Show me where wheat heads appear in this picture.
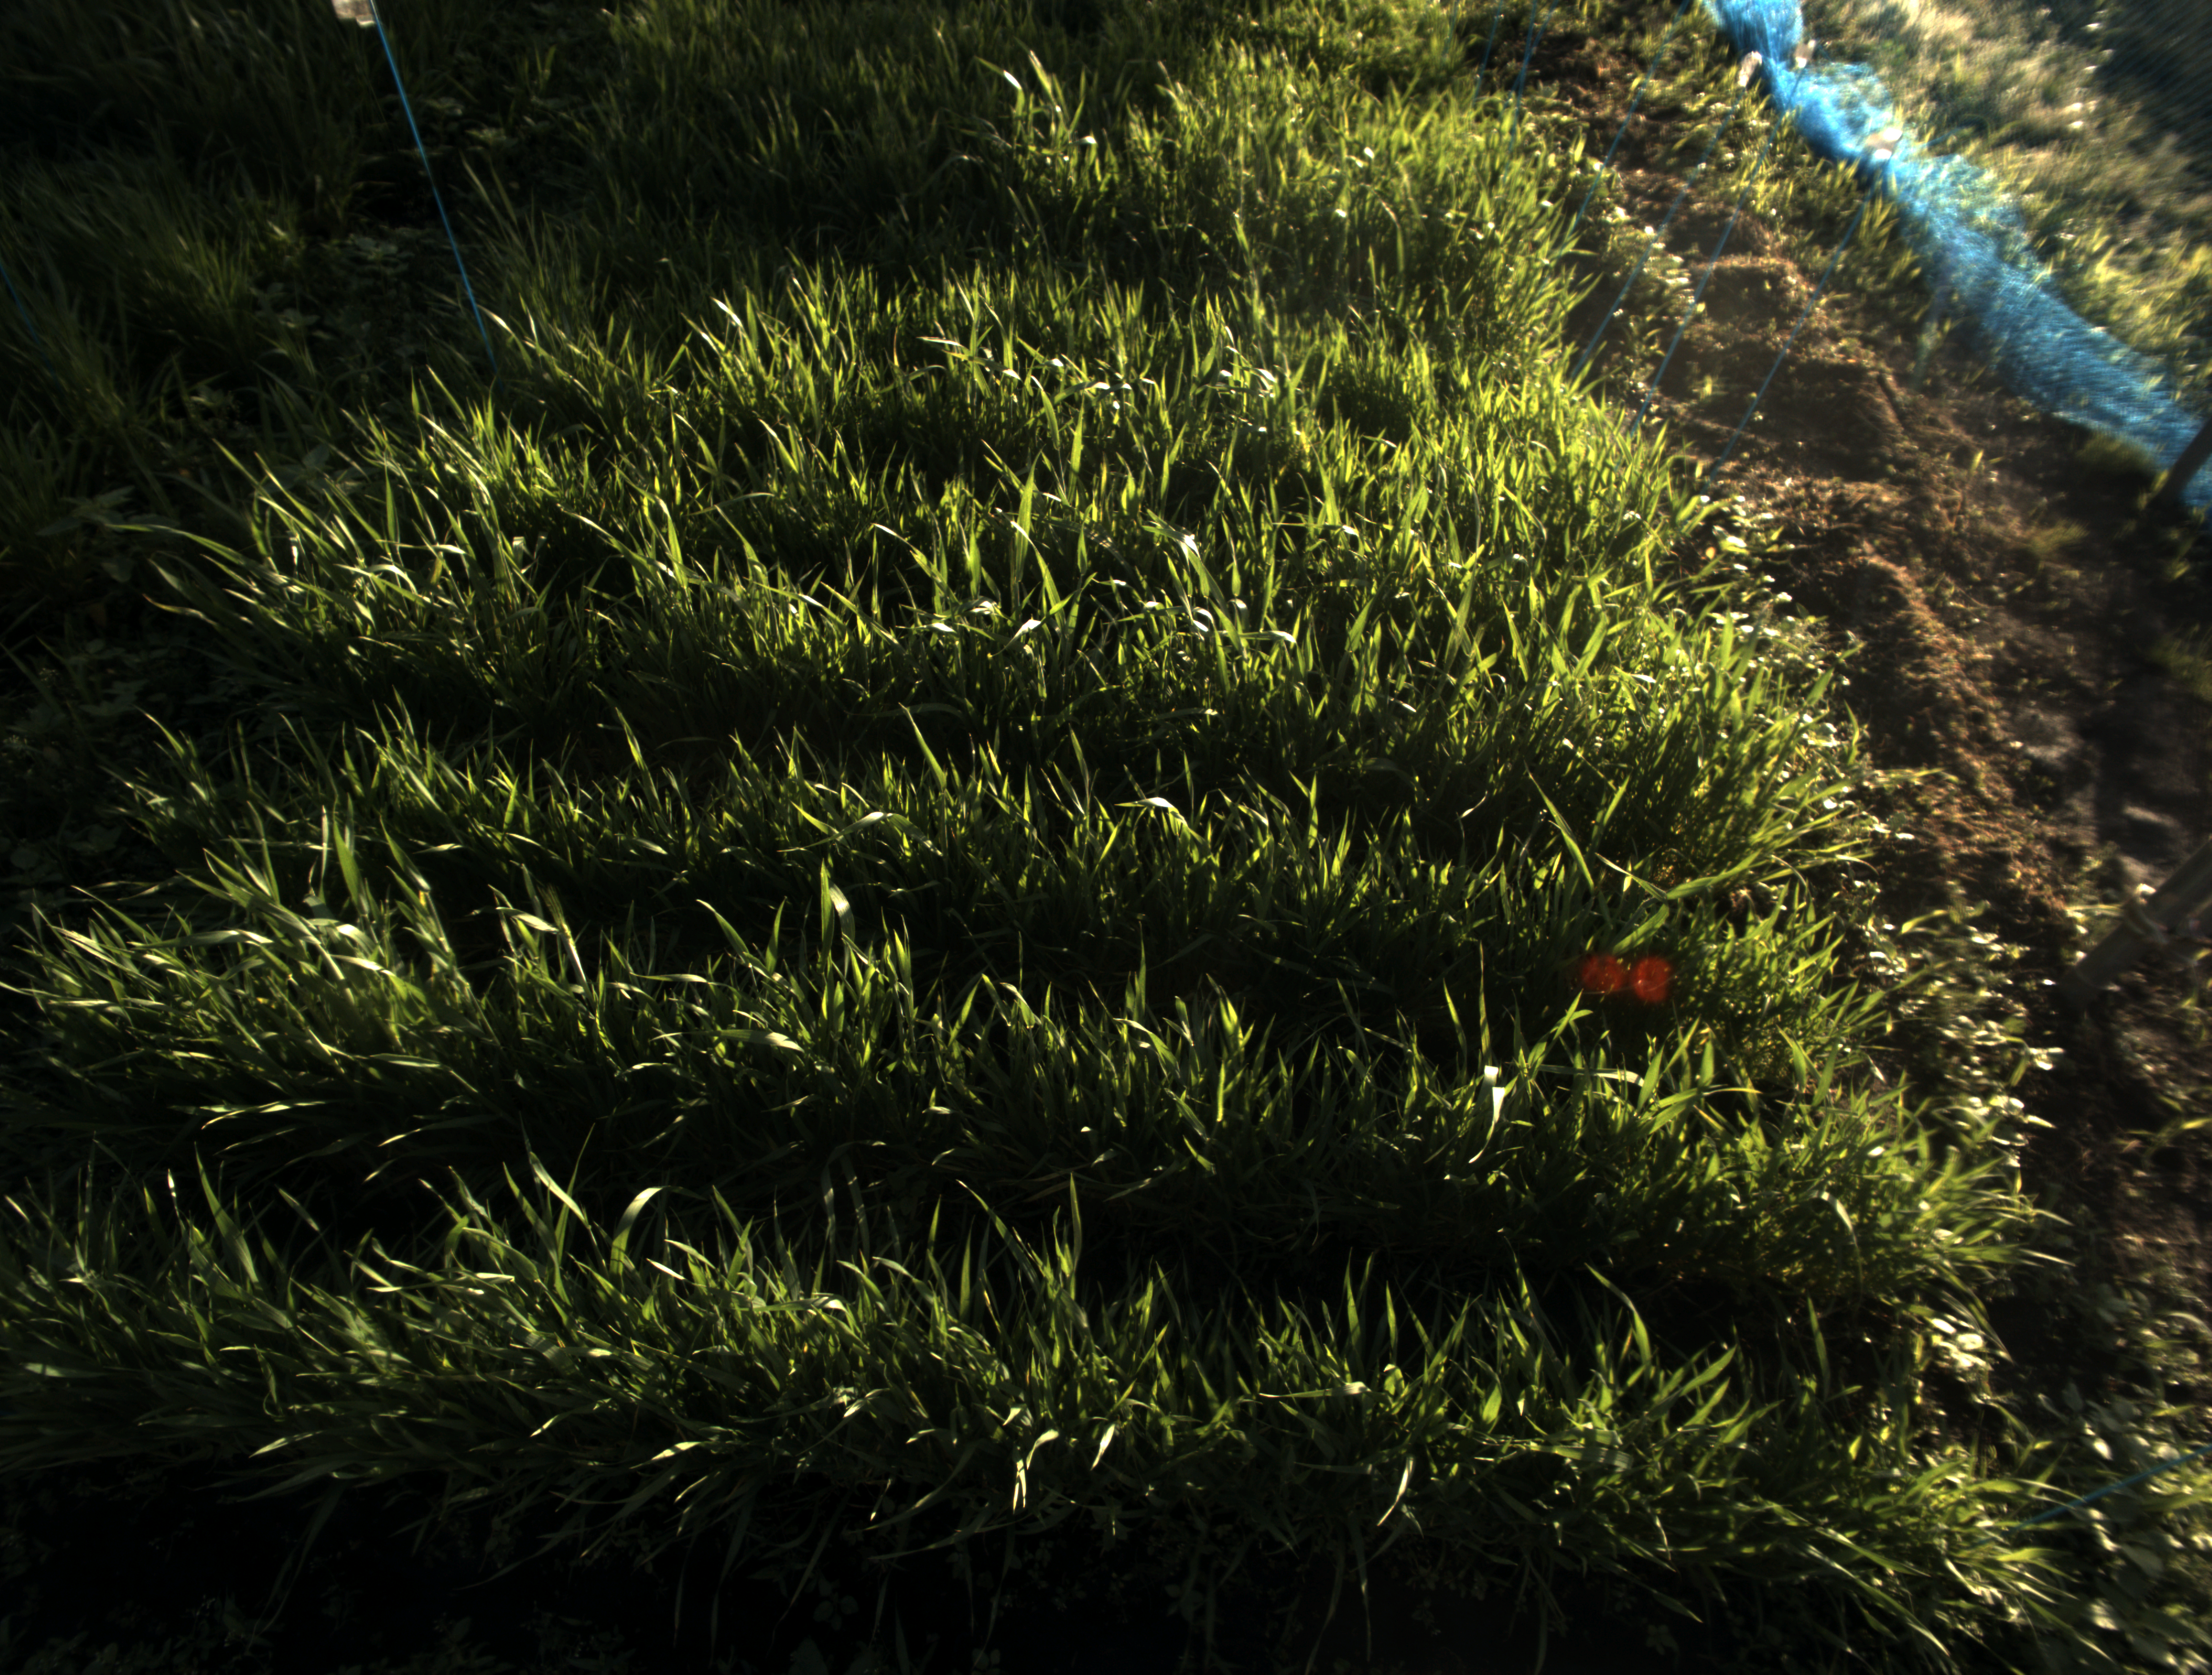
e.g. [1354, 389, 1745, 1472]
[1457, 648, 1477, 687]
[1561, 688, 1592, 736]
[1440, 638, 1457, 683]
[558, 921, 573, 938]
